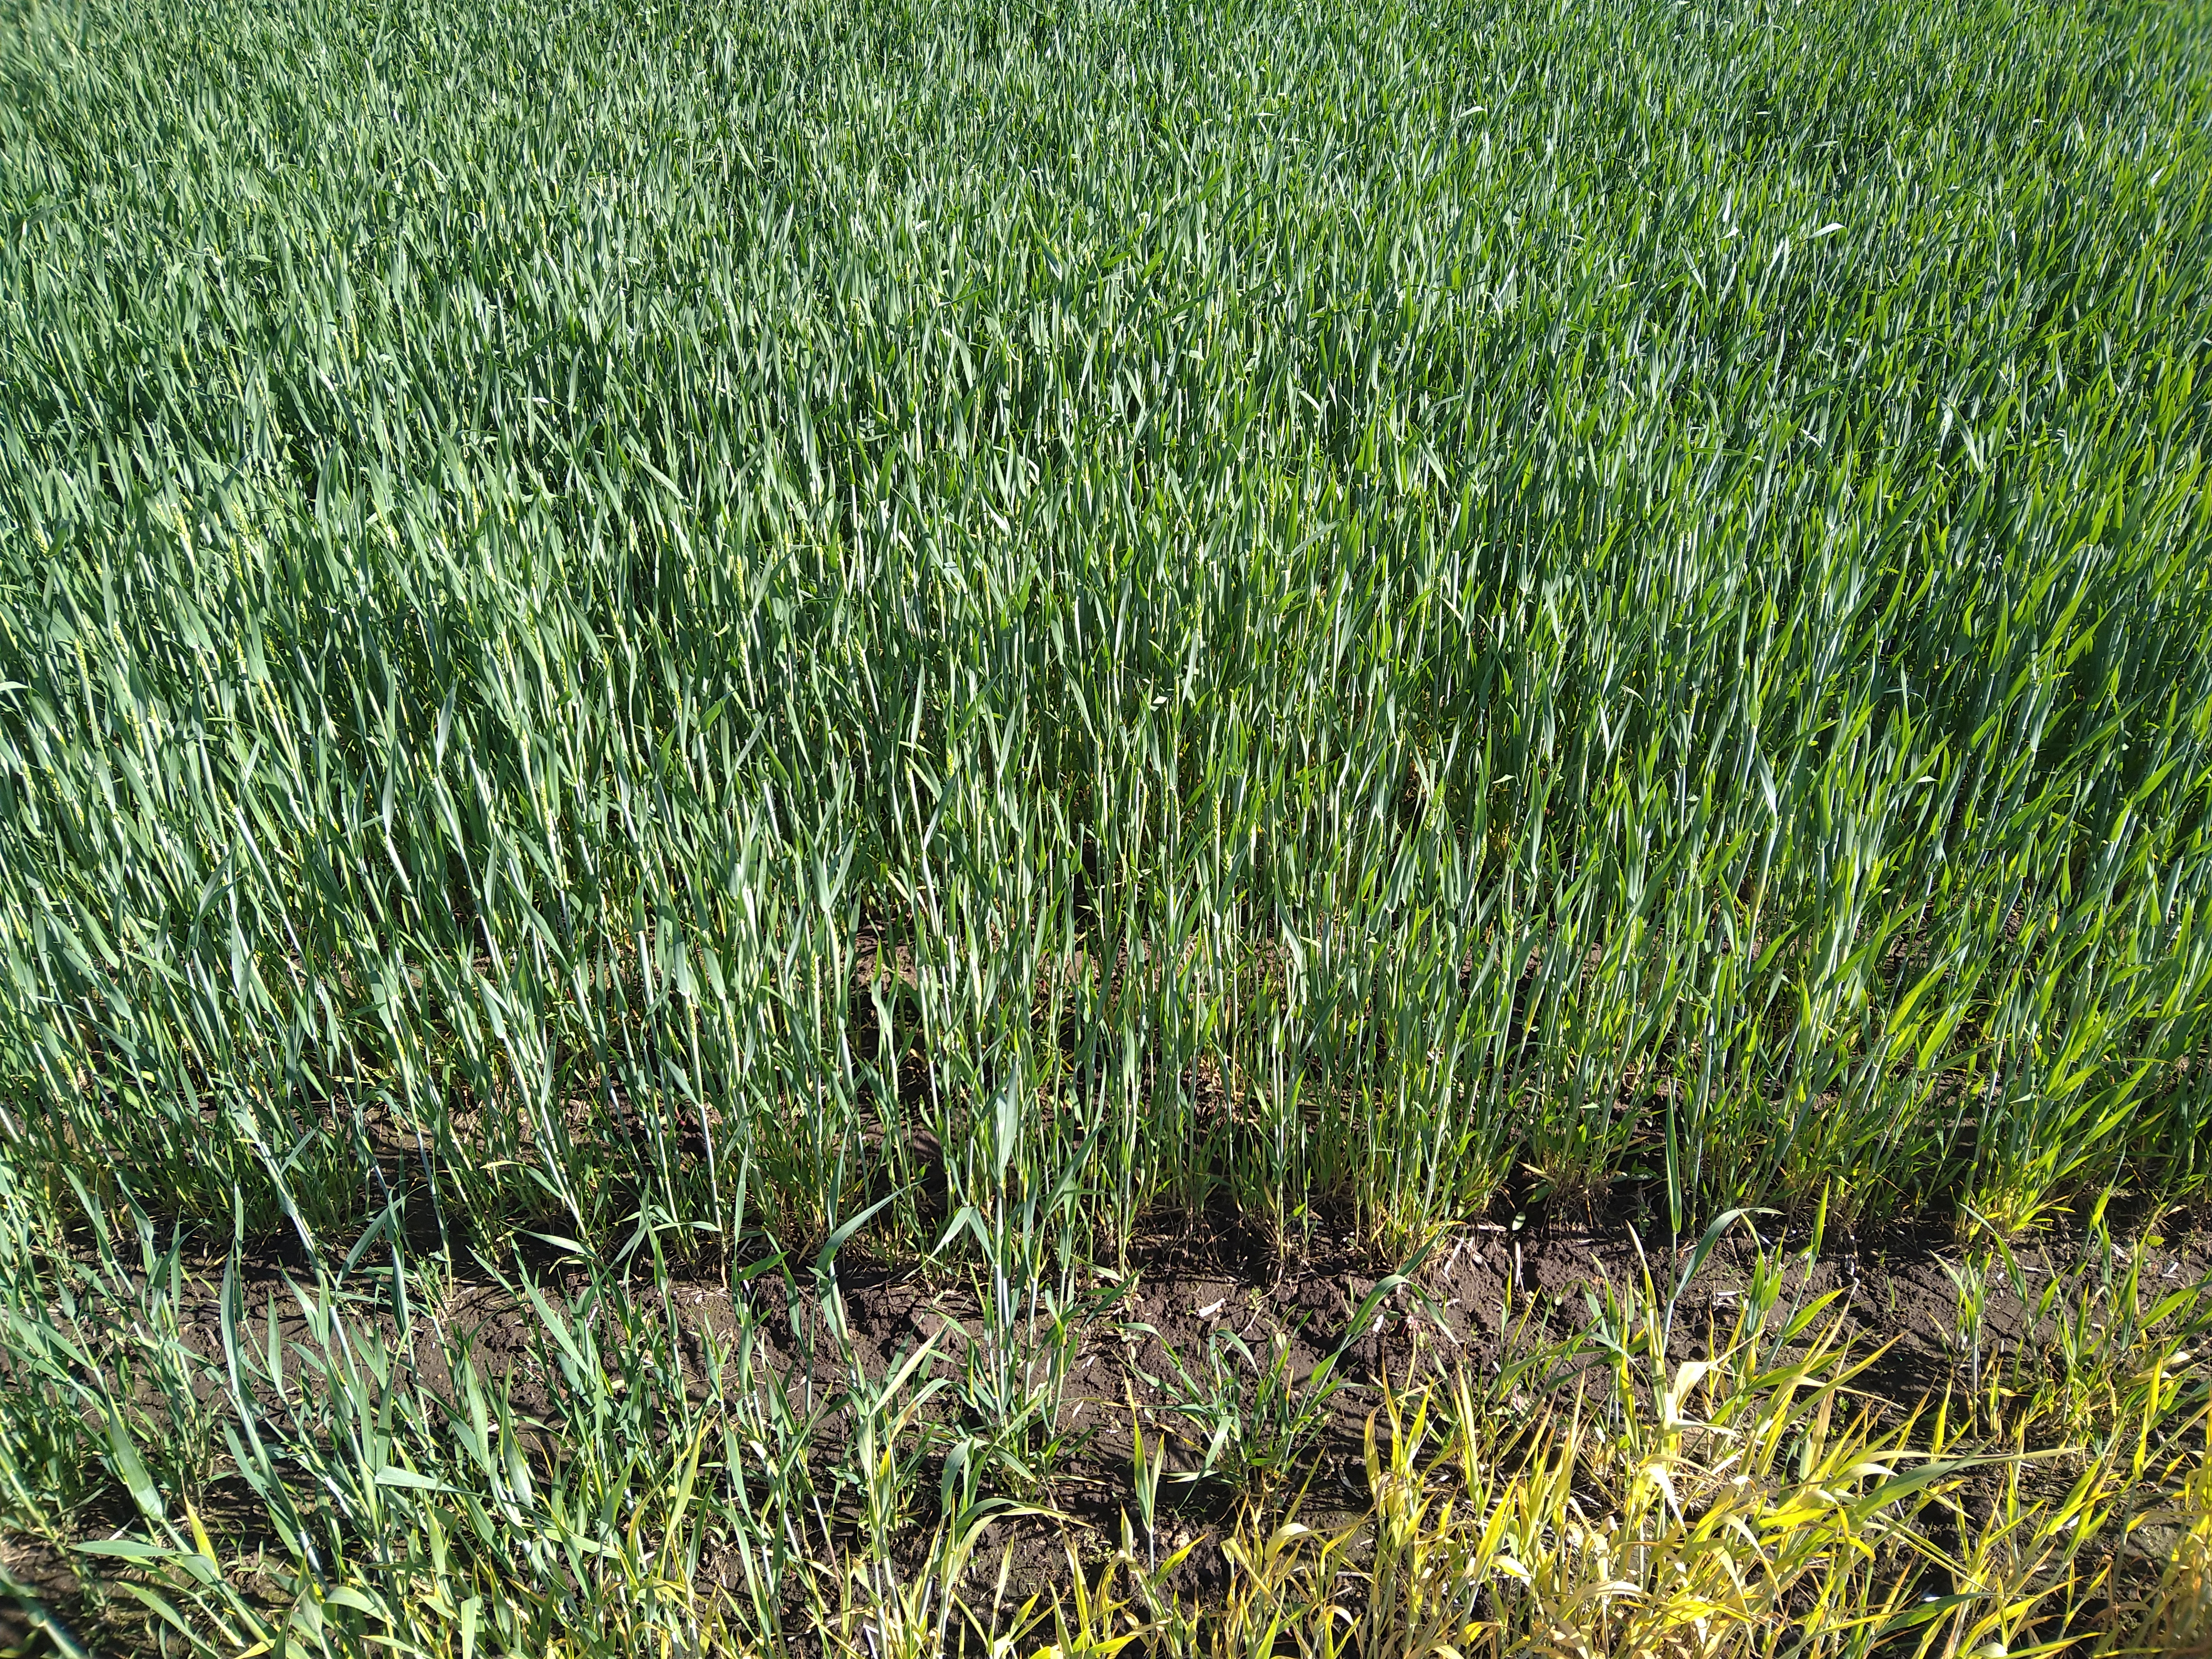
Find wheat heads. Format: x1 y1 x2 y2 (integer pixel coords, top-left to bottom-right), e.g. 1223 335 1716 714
258 563 264 582
526 611 537 643
1910 40 1916 67
180 348 188 367
472 486 478 519
297 10 301 19
539 782 550 835
1042 226 1048 243
1756 702 1760 724
1172 793 1178 827
530 150 536 169
479 197 485 220
784 528 789 554
502 261 514 291
2083 977 2091 1000
85 110 88 119
509 185 514 200
617 126 622 160
629 521 634 537
234 504 250 561
93 563 102 579
560 655 567 686
1683 526 1689 562
220 346 236 383
422 749 437 805
1583 553 1587 567
981 563 990 598
1797 242 1802 259
285 546 292 559
0 237 4 247
447 503 450 518
219 785 239 830
106 528 116 559
1083 462 1088 480
2117 603 2126 627
2101 205 2113 237
785 340 791 354
947 749 953 777
1838 609 1844 626
727 1009 736 1041
1551 755 1564 786
559 563 565 579
1383 919 1390 944
1248 550 1254 576
91 200 97 213
954 576 960 589
739 633 745 669
576 231 580 246
103 204 108 215
325 100 332 116
343 656 352 681
1002 208 1007 224
906 263 909 282
355 129 360 146
464 602 473 625
376 827 386 848
1572 591 1579 609
106 162 111 173
567 100 571 113
1053 239 1058 260
832 12 835 25
603 647 610 667
230 537 243 578
369 55 377 88
290 226 295 239
1069 588 1074 614
911 33 915 49
291 69 295 81
1287 555 1292 571
610 609 621 642
1996 40 2005 64
2025 759 2034 782
1434 549 1441 571
1416 483 1420 498
842 642 848 665
269 132 273 139
772 549 777 567
935 578 943 604
905 560 913 584
695 242 699 262
336 337 345 363
71 252 75 259
1196 594 1201 634
309 175 313 187
1208 320 1212 339
1316 589 1319 609
1188 500 1193 517
854 634 871 686
1676 473 1681 487
687 563 694 591
1560 646 1565 659
1154 414 1158 428
1239 330 1243 347
188 26 192 34
234 638 245 665
113 622 129 660
1342 794 1349 841
1630 925 1636 952
811 948 817 999
539 212 546 248
2144 163 2151 176
272 685 283 717
309 825 316 844
600 174 603 184
1108 544 1113 574
736 557 745 609
1086 251 1091 269
2137 521 2146 536
261 632 278 662
2098 498 2102 504
1581 730 1588 773
35 528 50 556
1015 497 1020 514
1633 52 1639 72
712 364 715 379
507 64 515 80
111 121 118 135
1306 490 1312 527
686 1003 695 1036
107 191 113 205
63 258 67 271
257 677 273 714
648 613 659 647
1689 696 1696 717
1435 788 1445 821
1317 600 1324 618
1419 595 1427 624
1206 379 1209 390
23 760 34 796
12 462 23 485
648 106 652 125
2001 573 2006 608
245 205 249 225
1471 321 1480 353
364 91 368 102
35 59 41 73
208 42 213 51
149 701 157 729
333 240 340 255
1189 608 1193 620
905 763 911 788
976 388 980 417
500 206 504 215
1211 305 1215 316
392 14 399 27
1424 810 1432 839
1298 518 1302 541
362 96 368 111
437 575 444 604
889 554 898 597
2066 70 2075 99
1185 519 1192 532
456 487 462 511
180 115 183 122
972 486 980 528
835 534 843 561
80 194 85 210
50 120 54 131
1845 624 1851 645
1401 331 1405 346
1245 599 1249 631
430 167 436 186
215 244 222 259
840 384 844 403
801 522 805 543
360 27 364 36
662 531 673 559
424 32 430 45
856 302 863 318
351 321 359 353
1269 482 1274 525
1033 538 1037 550
1473 835 1486 879
372 501 388 534
1691 877 1702 917
1603 508 1611 533
60 1054 76 1090
1060 317 1066 345
806 322 809 340
1935 416 1945 436
1102 509 1108 543
257 382 264 403
45 764 66 810
311 238 315 255
1814 588 1824 615
497 643 504 673
2019 544 2034 594
39 220 47 240
351 566 360 578
180 496 199 522
1955 552 1971 580
93 121 99 136
272 605 281 624
295 831 301 846
1304 606 1311 628
439 525 449 549
1833 610 1839 630
1349 931 1354 957
50 85 54 95
175 510 191 547
1674 533 1682 563
199 657 207 670
1879 38 1882 48
199 39 203 55
674 690 682 718
76 806 83 823
300 601 310 626
1161 767 1168 813
56 736 65 745
177 134 183 149
938 634 949 662
1334 524 1348 577
1223 846 1232 882
751 329 757 355
1401 541 1406 566
2148 478 2165 523
1786 816 1793 837
586 187 589 197
458 221 462 232
63 23 68 32
156 237 162 247
455 30 459 41
508 504 516 540
464 357 473 381
1574 486 1583 510
1211 794 1218 835
900 582 904 597
155 503 166 523
870 376 876 398
1319 530 1330 560
1908 34 1912 43
1375 395 1378 410
74 638 89 679
1759 656 1766 683
130 703 143 747
190 203 194 214
185 236 190 246
1901 532 1909 560
334 821 339 833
